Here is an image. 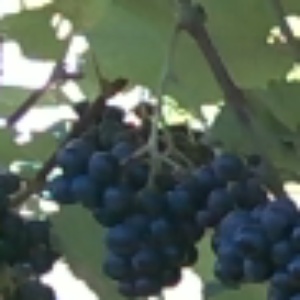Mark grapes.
<instances>
[{
	"label": "grapes",
	"mask_w": 300,
	"mask_h": 300,
	"mask_svg": "<svg viewBox=\"0 0 300 300\" xmlns=\"http://www.w3.org/2000/svg\"><path fill=\"white\" fill-rule=\"evenodd\" d=\"M108 106L63 144L53 200L79 205L107 227L102 262L122 295H150L177 283L194 263L205 229L215 228L213 271L235 286L268 279V300H300V210L267 201L236 154L214 157L204 131L175 121L159 130L124 125Z\"/></svg>",
	"instance_id": "1"
}]
</instances>
